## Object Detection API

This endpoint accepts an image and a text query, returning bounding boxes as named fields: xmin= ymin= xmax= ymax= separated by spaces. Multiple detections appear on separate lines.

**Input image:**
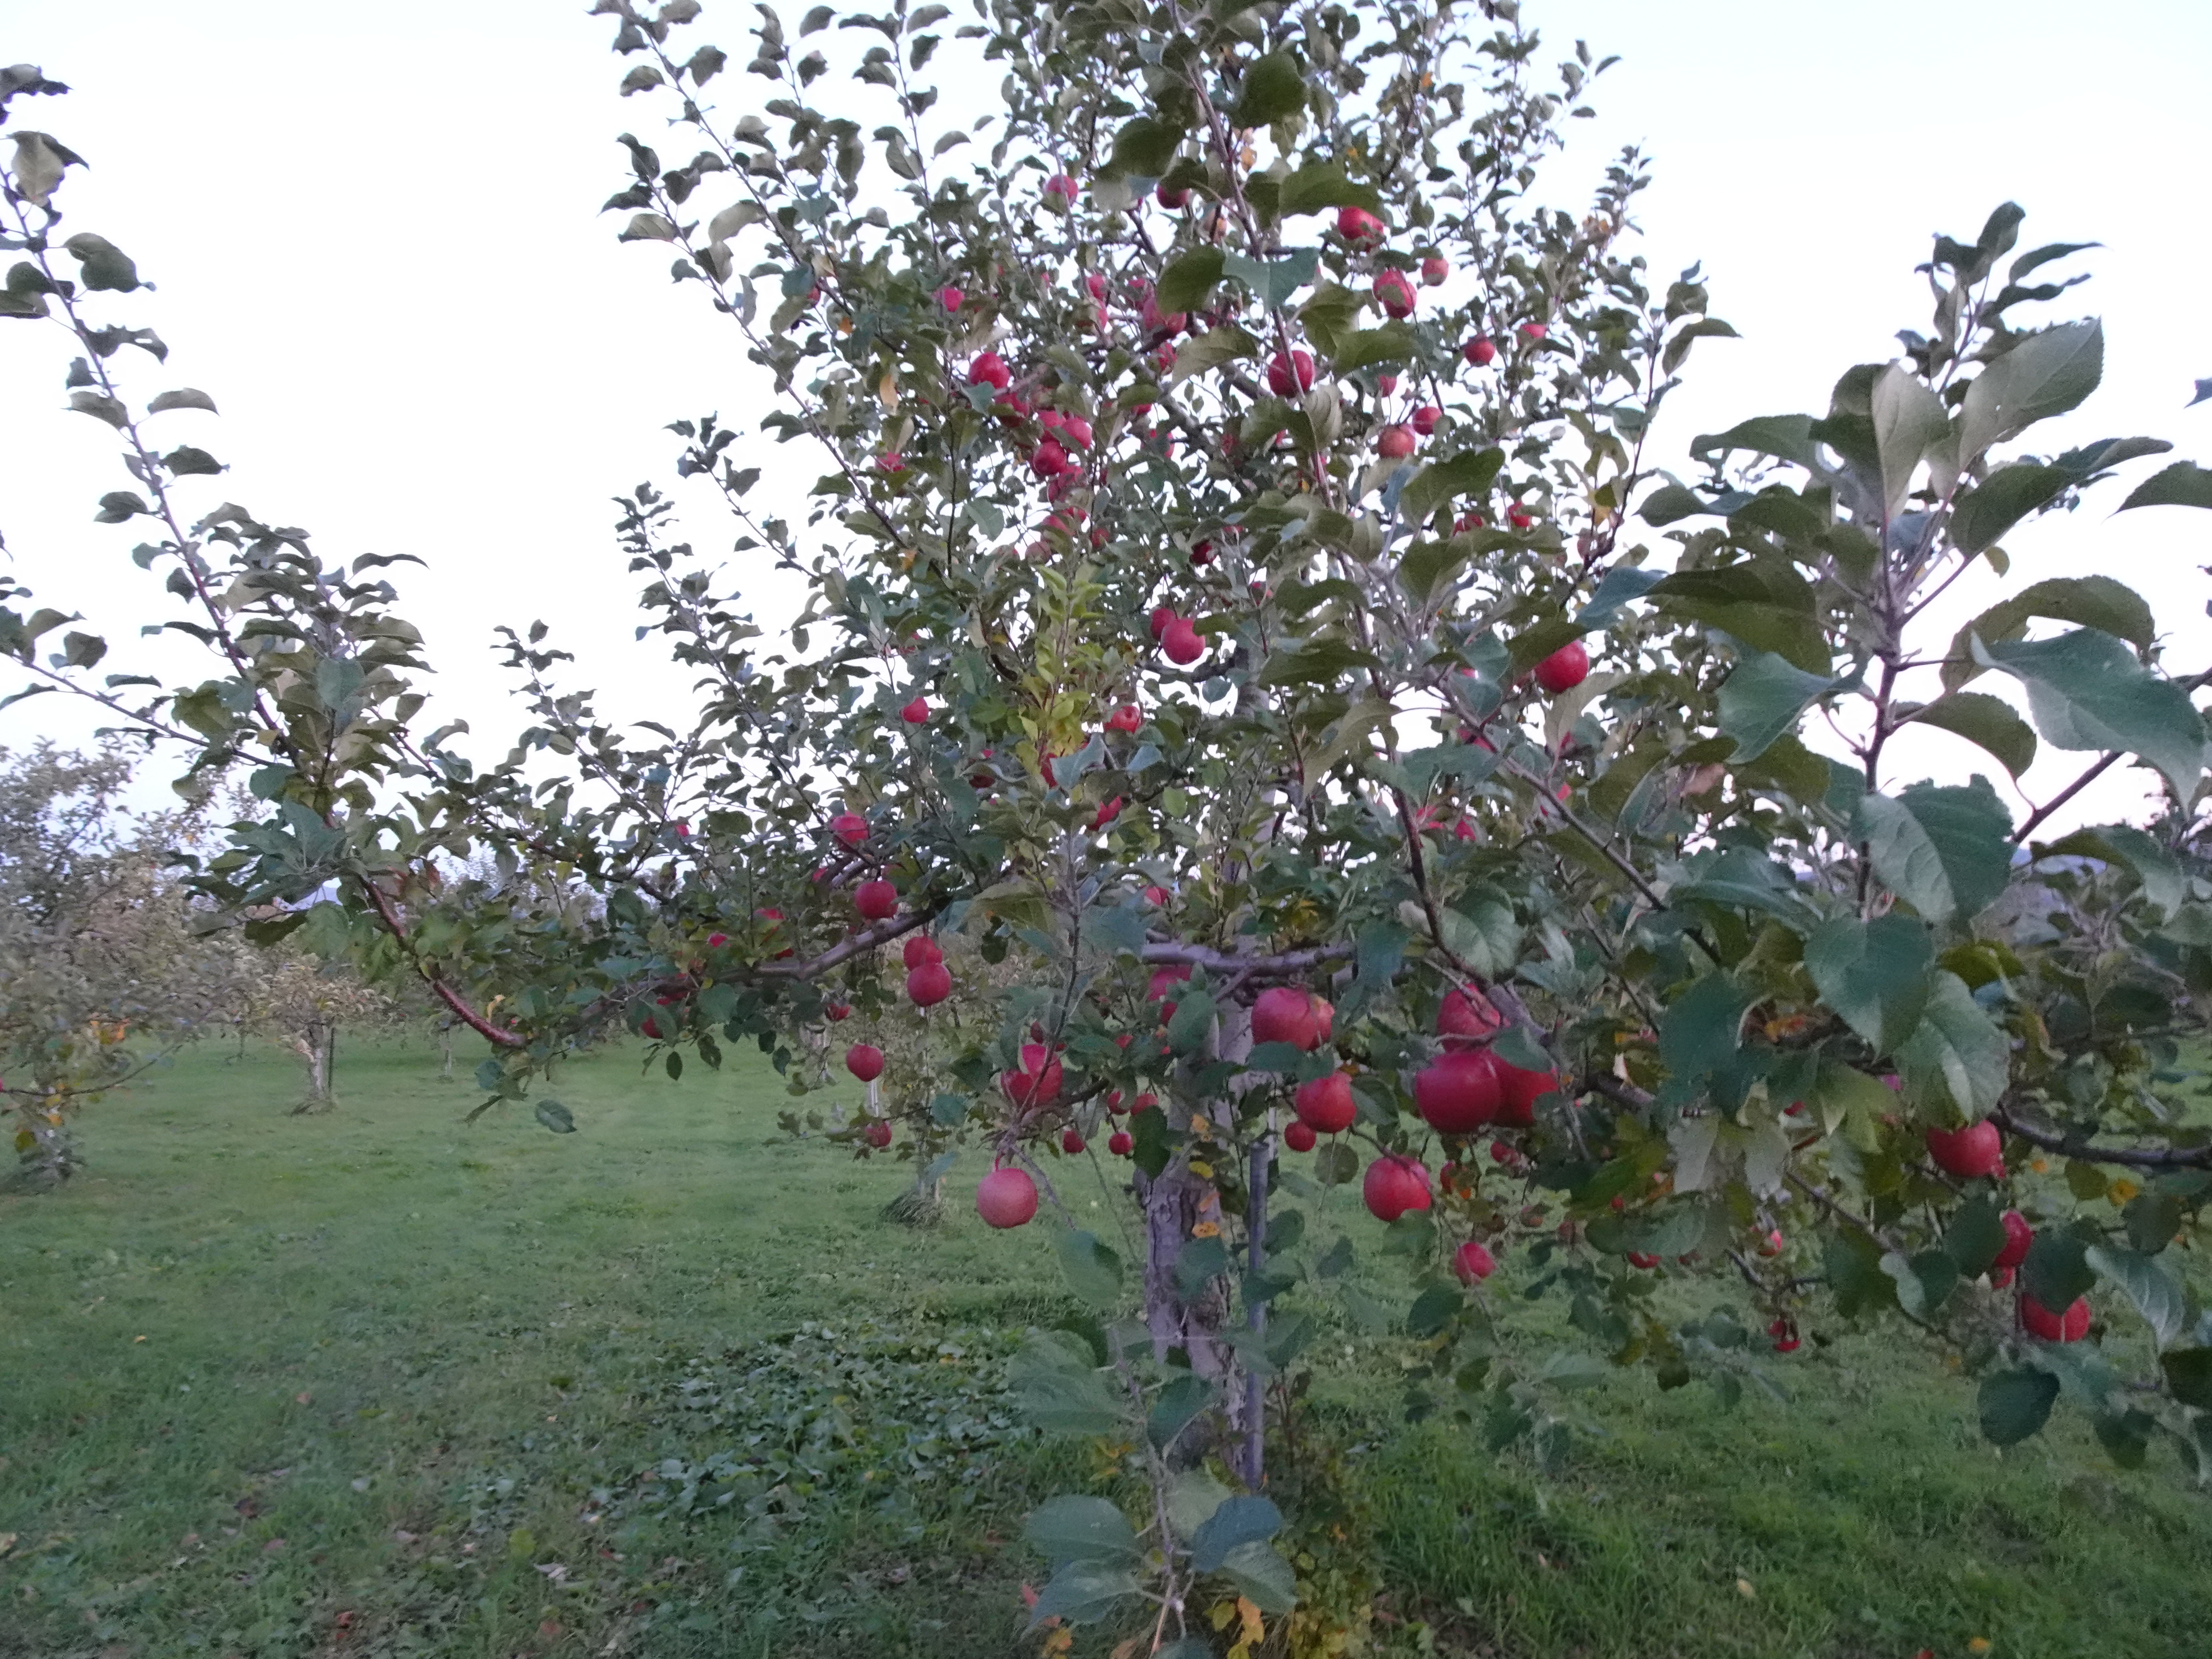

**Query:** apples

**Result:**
xmin=1218 ymin=52 xmax=1262 ymax=94
xmin=1199 ymin=210 xmax=1231 ymax=245
xmin=1288 ymin=908 xmax=1322 ymax=939
xmin=993 ymin=387 xmax=1032 ymax=430
xmin=1156 ymin=178 xmax=1191 ymax=210
xmin=1042 ymin=513 xmax=1074 ymax=546
xmin=1338 ymin=203 xmax=1384 ymax=251
xmin=1047 ymin=478 xmax=1094 ymax=518
xmin=753 ymin=907 xmax=788 ymax=939
xmin=1765 ymin=1312 xmax=1802 ymax=1353
xmin=1206 ymin=304 xmax=1235 ymax=333
xmin=2018 ymin=1283 xmax=2091 ymax=1344
xmin=1373 ymin=265 xmax=1407 ymax=305
xmin=1404 ymin=801 xmax=1446 ymax=847
xmin=666 ymin=950 xmax=709 ymax=985
xmin=1873 ymin=1108 xmax=1898 ymax=1140
xmin=1748 ymin=1222 xmax=1782 ymax=1257
xmin=1411 ymin=405 xmax=1444 ymax=435
xmin=1925 ymin=1109 xmax=2001 ymax=1179
xmin=1519 ymin=1204 xmax=1545 ymax=1228
xmin=1222 ymin=422 xmax=1255 ymax=461
xmin=1303 ymin=450 xmax=1329 ymax=479
xmin=1202 ymin=138 xmax=1236 ymax=166
xmin=1285 ymin=1120 xmax=1317 ymax=1154
xmin=1788 ymin=1131 xmax=1820 ymax=1153
xmin=1145 ymin=963 xmax=1206 ymax=1028
xmin=1148 ymin=342 xmax=1181 ymax=376
xmin=916 ymin=383 xmax=955 ymax=419
xmin=1163 ymin=616 xmax=1205 ymax=667
xmin=1034 ymin=409 xmax=1066 ymax=446
xmin=1465 ymin=988 xmax=1522 ymax=1031
xmin=1114 ymin=1033 xmax=1138 ymax=1060
xmin=1622 ymin=1230 xmax=1661 ymax=1272
xmin=1462 ymin=512 xmax=1489 ymax=539
xmin=1577 ymin=532 xmax=1609 ymax=562
xmin=1072 ymin=299 xmax=1110 ymax=336
xmin=1396 ymin=421 xmax=1416 ymax=441
xmin=939 ymin=409 xmax=993 ymax=453
xmin=1439 ymin=605 xmax=1456 ymax=624
xmin=1108 ymin=1130 xmax=1135 ymax=1157
xmin=1968 ymin=1636 xmax=1992 ymax=1655
xmin=1453 ymin=723 xmax=1501 ymax=766
xmin=1420 ymin=253 xmax=1451 ymax=286
xmin=1611 ymin=1185 xmax=1635 ymax=1213
xmin=1545 ymin=1018 xmax=1567 ymax=1037
xmin=1979 ymin=1209 xmax=2035 ymax=1270
xmin=975 ymin=1166 xmax=1040 ymax=1231
xmin=902 ymin=693 xmax=929 ymax=724
xmin=1276 ymin=755 xmax=1309 ymax=790
xmin=1503 ymin=501 xmax=1533 ymax=532
xmin=1491 ymin=1053 xmax=1583 ymax=1126
xmin=844 ymin=1043 xmax=886 ymax=1082
xmin=1378 ymin=426 xmax=1417 ymax=466
xmin=1267 ymin=350 xmax=1313 ymax=400
xmin=704 ymin=931 xmax=737 ymax=959
xmin=1463 ymin=335 xmax=1496 ymax=368
xmin=968 ymin=900 xmax=995 ymax=924
xmin=1436 ymin=983 xmax=1499 ymax=1058
xmin=1058 ymin=415 xmax=1097 ymax=453
xmin=1367 ymin=363 xmax=1399 ymax=399
xmin=818 ymin=254 xmax=838 ymax=278
xmin=1778 ymin=1089 xmax=1819 ymax=1127
xmin=1639 ymin=1022 xmax=1670 ymax=1052
xmin=1184 ymin=511 xmax=1240 ymax=557
xmin=1024 ymin=540 xmax=1052 ymax=567
xmin=1243 ymin=580 xmax=1281 ymax=614
xmin=1540 ymin=543 xmax=1568 ymax=570
xmin=822 ymin=991 xmax=853 ymax=1023
xmin=1454 ymin=658 xmax=1478 ymax=686
xmin=1031 ymin=1015 xmax=1058 ymax=1043
xmin=1259 ymin=415 xmax=1288 ymax=449
xmin=1414 ymin=1048 xmax=1503 ymax=1135
xmin=1053 ymin=506 xmax=1089 ymax=538
xmin=791 ymin=279 xmax=821 ymax=309
xmin=1533 ymin=632 xmax=1591 ymax=693
xmin=1518 ymin=322 xmax=1549 ymax=359
xmin=1129 ymin=1090 xmax=1161 ymax=1121
xmin=1144 ymin=294 xmax=1188 ymax=340
xmin=999 ymin=1045 xmax=1063 ymax=1109
xmin=1095 ymin=397 xmax=1132 ymax=430
xmin=1557 ymin=1221 xmax=1581 ymax=1243
xmin=1126 ymin=389 xmax=1153 ymax=417
xmin=1333 ymin=1060 xmax=1368 ymax=1093
xmin=1980 ymin=1256 xmax=2013 ymax=1290
xmin=1384 ymin=280 xmax=1419 ymax=323
xmin=1785 ymin=1015 xmax=1818 ymax=1045
xmin=972 ymin=292 xmax=1004 ymax=321
xmin=1363 ymin=1154 xmax=1433 ymax=1225
xmin=1451 ymin=521 xmax=1477 ymax=549
xmin=1101 ymin=704 xmax=1147 ymax=745
xmin=1106 ymin=640 xmax=1137 ymax=670
xmin=907 ymin=960 xmax=953 ymax=1009
xmin=824 ymin=302 xmax=858 ymax=334
xmin=993 ymin=545 xmax=1021 ymax=564
xmin=965 ymin=747 xmax=1001 ymax=788
xmin=1279 ymin=471 xmax=1311 ymax=499
xmin=855 ymin=881 xmax=900 ymax=920
xmin=1489 ymin=1140 xmax=1523 ymax=1166
xmin=810 ymin=868 xmax=839 ymax=891
xmin=1915 ymin=1644 xmax=1939 ymax=1659
xmin=1556 ymin=726 xmax=1586 ymax=752
xmin=831 ymin=818 xmax=871 ymax=851
xmin=1033 ymin=441 xmax=1067 ymax=475
xmin=981 ymin=258 xmax=1011 ymax=282
xmin=1679 ymin=760 xmax=1725 ymax=800
xmin=1295 ymin=1070 xmax=1357 ymax=1134
xmin=1123 ymin=277 xmax=1157 ymax=312
xmin=1873 ymin=1064 xmax=1907 ymax=1103
xmin=1506 ymin=645 xmax=1558 ymax=703
xmin=1059 ymin=1122 xmax=1091 ymax=1156
xmin=897 ymin=631 xmax=923 ymax=659
xmin=1451 ymin=1240 xmax=1497 ymax=1286
xmin=1884 ymin=883 xmax=1916 ymax=913
xmin=1083 ymin=785 xmax=1124 ymax=833
xmin=1178 ymin=532 xmax=1219 ymax=566
xmin=1104 ymin=1089 xmax=1134 ymax=1117
xmin=1056 ymin=464 xmax=1088 ymax=497
xmin=669 ymin=821 xmax=691 ymax=842
xmin=1136 ymin=887 xmax=1161 ymax=910
xmin=1248 ymin=987 xmax=1321 ymax=1056
xmin=1155 ymin=881 xmax=1170 ymax=903
xmin=965 ymin=350 xmax=1011 ymax=401
xmin=902 ymin=933 xmax=945 ymax=973
xmin=1639 ymin=1170 xmax=1663 ymax=1188
xmin=1024 ymin=379 xmax=1058 ymax=414
xmin=874 ymin=447 xmax=909 ymax=485
xmin=1127 ymin=195 xmax=1144 ymax=213
xmin=1207 ymin=585 xmax=1234 ymax=612
xmin=1074 ymin=662 xmax=1108 ymax=695
xmin=1042 ymin=174 xmax=1081 ymax=215
xmin=1141 ymin=427 xmax=1175 ymax=462
xmin=1146 ymin=601 xmax=1200 ymax=643
xmin=928 ymin=284 xmax=967 ymax=324
xmin=1444 ymin=814 xmax=1481 ymax=854
xmin=1531 ymin=772 xmax=1577 ymax=820
xmin=1028 ymin=269 xmax=1053 ymax=291
xmin=1295 ymin=992 xmax=1337 ymax=1049
xmin=768 ymin=926 xmax=802 ymax=962
xmin=639 ymin=992 xmax=686 ymax=1041
xmin=1038 ymin=740 xmax=1104 ymax=801
xmin=863 ymin=1117 xmax=894 ymax=1149
xmin=1439 ymin=1161 xmax=1476 ymax=1200
xmin=1090 ymin=528 xmax=1111 ymax=550
xmin=1080 ymin=274 xmax=1108 ymax=308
